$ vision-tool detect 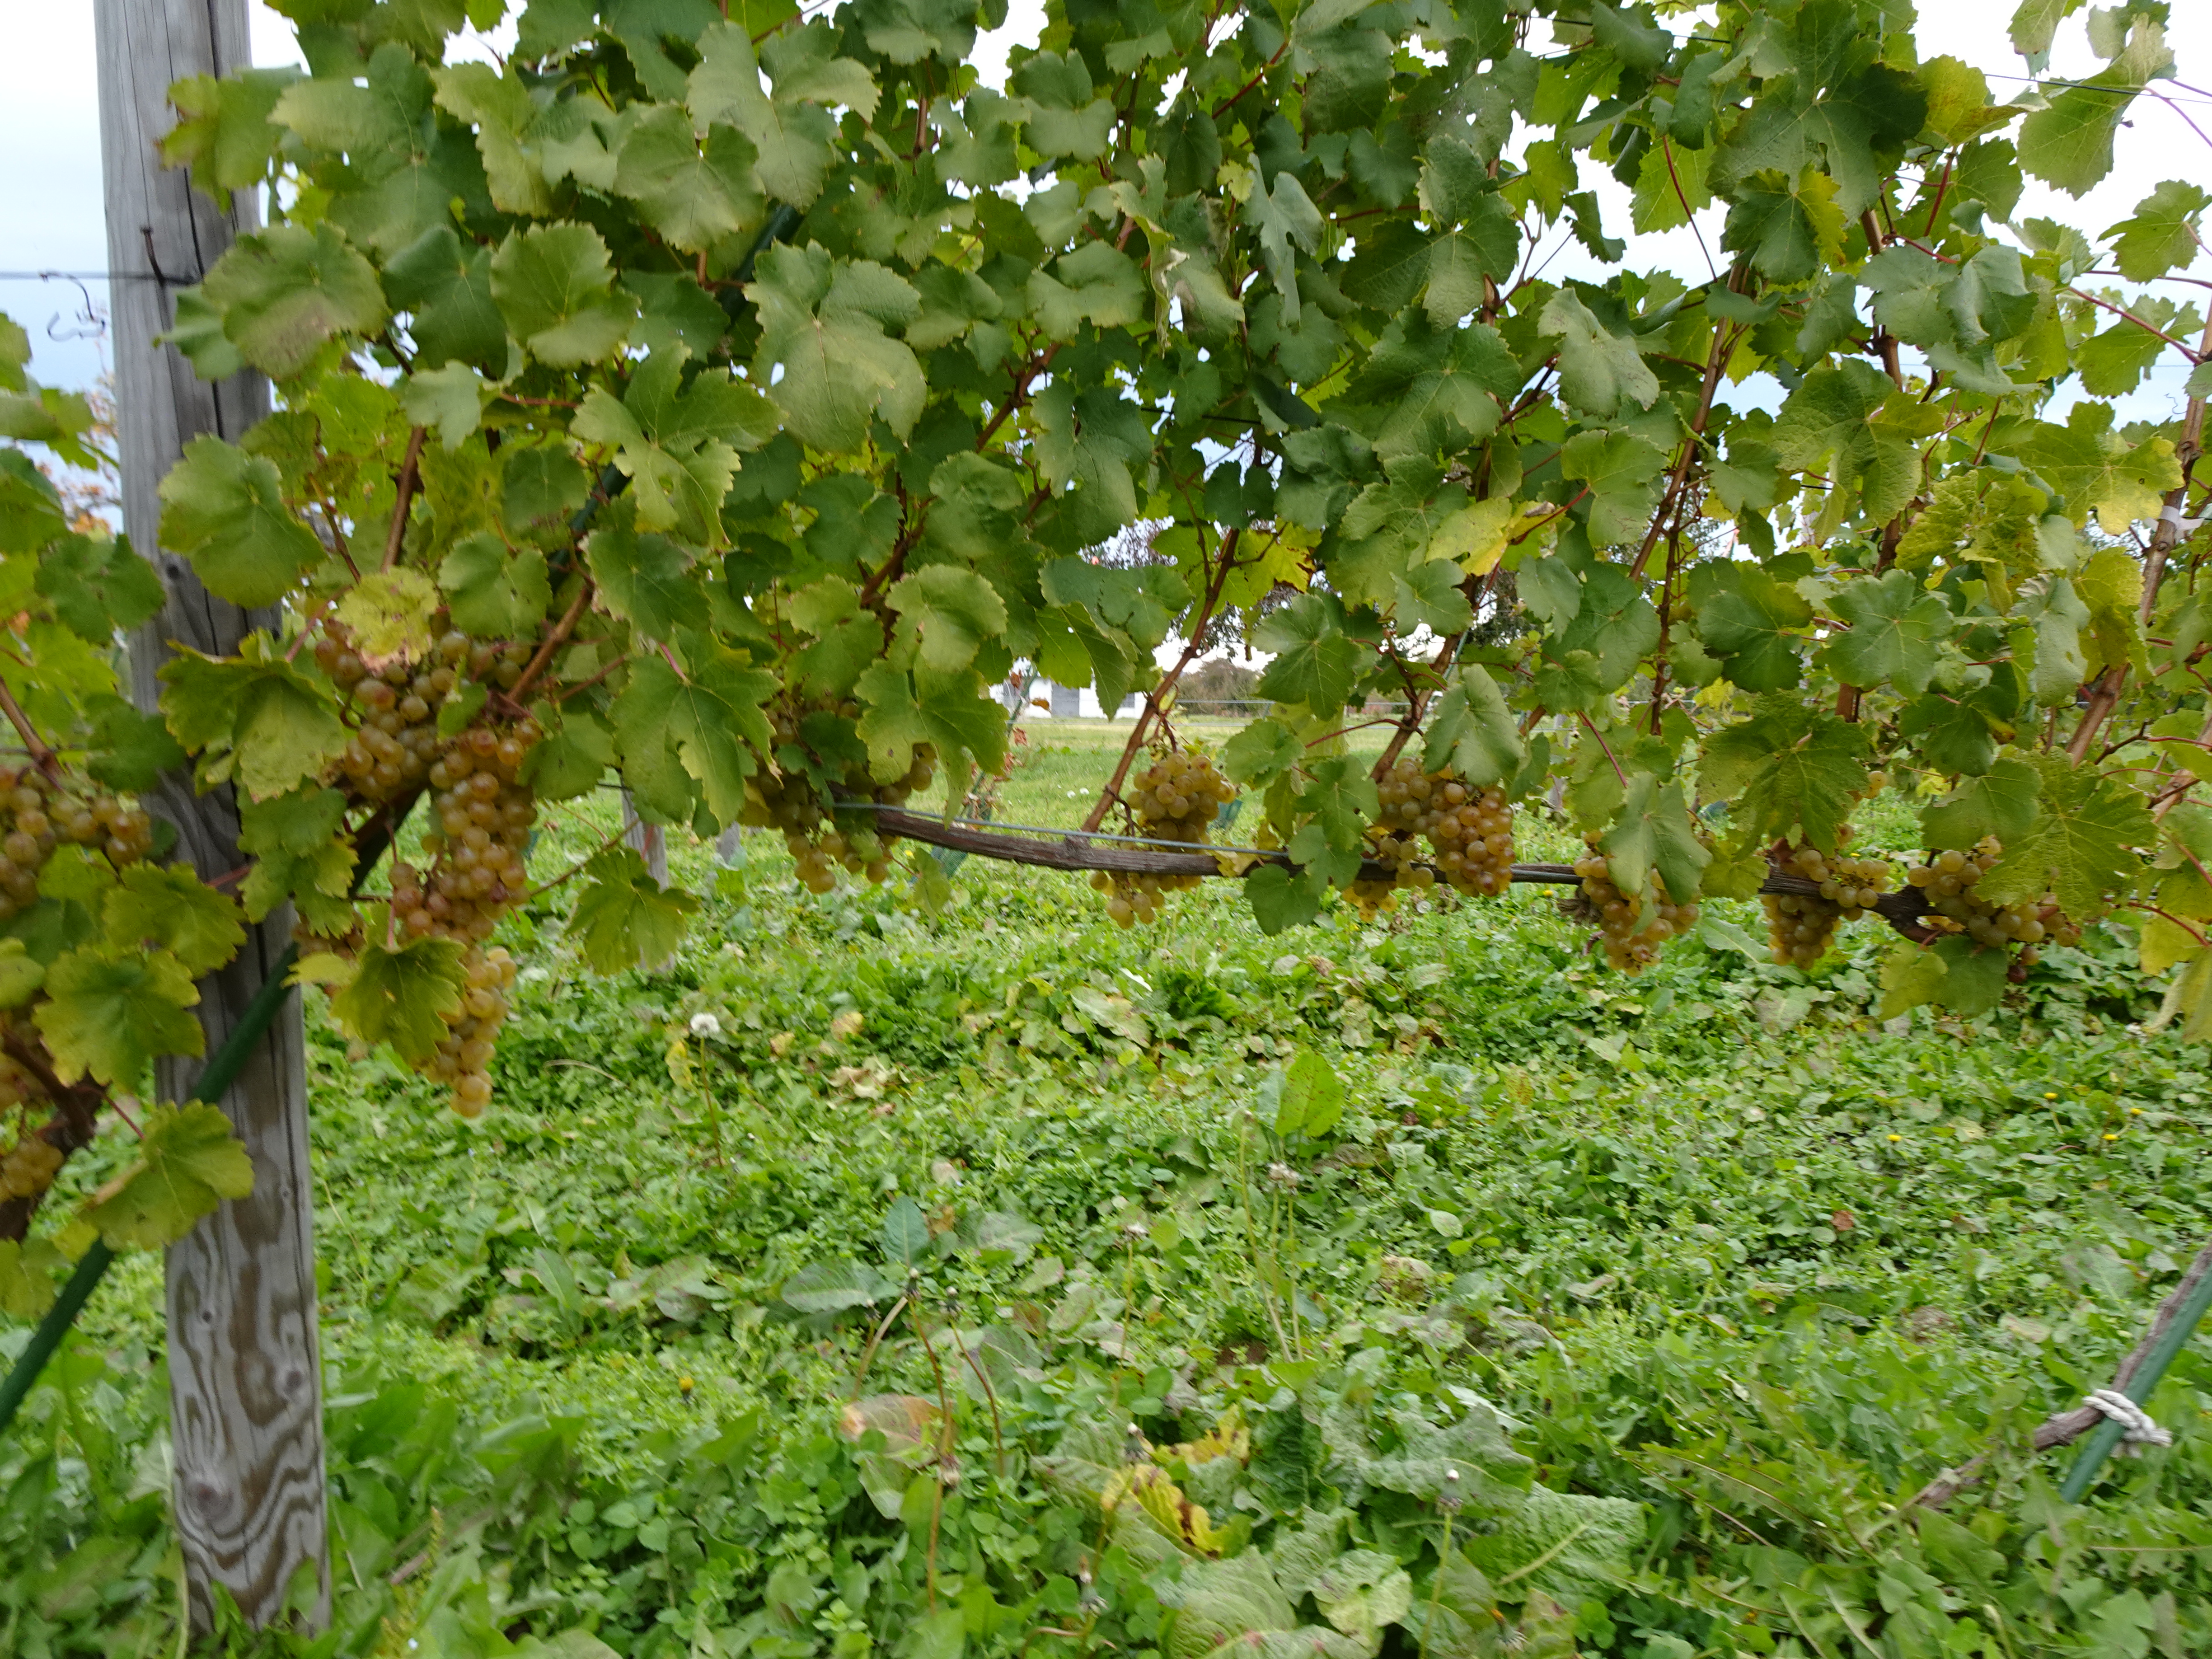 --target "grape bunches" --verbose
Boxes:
[402,625,539,721]
[316,596,471,807]
[1571,826,1702,978]
[737,703,843,894]
[1123,743,1237,889]
[1755,847,1901,971]
[1374,753,1521,900]
[1084,824,1165,932]
[0,770,59,925]
[2017,909,2084,974]
[382,720,544,968]
[3,1130,68,1197]
[1339,834,1437,926]
[1906,836,2045,944]
[44,779,163,871]
[291,907,375,1013]
[1830,768,1889,854]
[416,951,517,1118]
[2,1010,41,1112]
[825,734,943,882]
[2077,877,2135,920]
